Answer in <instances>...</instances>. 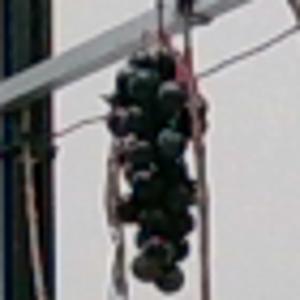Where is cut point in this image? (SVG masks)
Segmentation results:
<instances>
[{"instance_id":"obj_1","label":"cut point","mask_w":300,"mask_h":300,"mask_svg":"<svg viewBox=\"0 0 300 300\" xmlns=\"http://www.w3.org/2000/svg\"><path fill=\"white\" fill-rule=\"evenodd\" d=\"M152 8L157 13V35L159 40L164 45L165 49L172 53L177 61V72L180 74V61L176 52L171 47L165 33H164V12H165V0H154L152 3Z\"/></svg>"}]
</instances>
